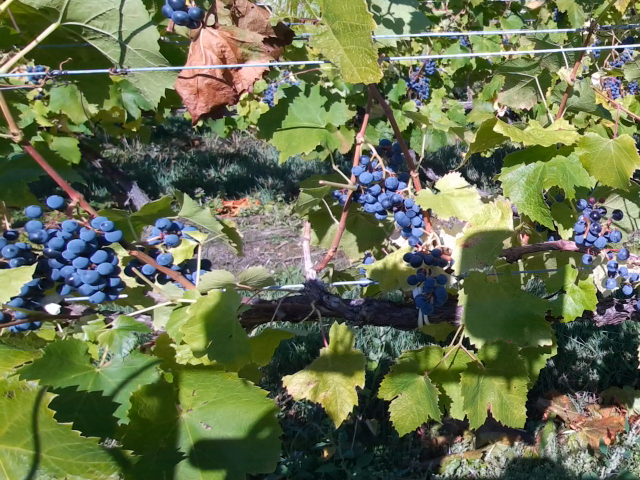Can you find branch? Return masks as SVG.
Segmentation results:
<instances>
[{"instance_id":"branch-1","label":"branch","mask_w":640,"mask_h":480,"mask_svg":"<svg viewBox=\"0 0 640 480\" xmlns=\"http://www.w3.org/2000/svg\"><path fill=\"white\" fill-rule=\"evenodd\" d=\"M373 97H375L376 102L378 103L380 108L384 111L385 115L390 121L392 128L394 129V131L398 136L405 162L408 168L410 169V171L416 173V176L414 179V188L417 192H420L422 190V186H421V180L419 178V170L412 160L405 134L402 128L399 126L396 116L393 114L392 110L388 107V105L382 98V95L380 94L375 84L370 85L367 90L365 109L363 111V118L360 122L359 128L357 130V134H356L355 150L352 155V163L354 165H358L360 163L359 158L362 152L363 137H364L365 130L367 128V124L371 118L370 113L372 111Z\"/></svg>"},{"instance_id":"branch-2","label":"branch","mask_w":640,"mask_h":480,"mask_svg":"<svg viewBox=\"0 0 640 480\" xmlns=\"http://www.w3.org/2000/svg\"><path fill=\"white\" fill-rule=\"evenodd\" d=\"M0 106L3 115L14 134L18 138V142L22 144L26 150L32 155V157L39 163V165L46 171V173L55 180L64 190H66L73 198H75L91 216L96 214V211L91 207L88 201L79 194L71 185L64 181L58 173H56L52 167L42 158L32 144L26 139L23 132L18 128L17 124L10 113L7 101L4 96V92L0 90Z\"/></svg>"},{"instance_id":"branch-3","label":"branch","mask_w":640,"mask_h":480,"mask_svg":"<svg viewBox=\"0 0 640 480\" xmlns=\"http://www.w3.org/2000/svg\"><path fill=\"white\" fill-rule=\"evenodd\" d=\"M353 195L354 192L352 190H349L346 193V199H345V206H344V212L342 214V220L339 224L338 230L336 231L335 235L332 238L331 243L329 244L328 250H327V256L325 258L324 261H321L317 266L316 269L318 271H322L323 269L327 268L333 258H334V253H335V249L337 247V245L339 244V240L340 238L343 236L345 229L349 223V217L351 214V208H352V202H353Z\"/></svg>"},{"instance_id":"branch-4","label":"branch","mask_w":640,"mask_h":480,"mask_svg":"<svg viewBox=\"0 0 640 480\" xmlns=\"http://www.w3.org/2000/svg\"><path fill=\"white\" fill-rule=\"evenodd\" d=\"M120 246L124 250L136 255L137 257H139V258L143 259L144 261H146L147 263L151 264L152 266L157 268L161 273L169 275L170 277H173L176 281H178L179 283L184 285L186 288H188L190 290H193L195 288V284L193 282H190L188 279H186L185 277L180 275L177 271L172 270L171 268L165 267L158 260H156L153 257L149 256L147 253L143 252L142 250L138 249L137 247L128 244L126 241H122L120 243Z\"/></svg>"},{"instance_id":"branch-5","label":"branch","mask_w":640,"mask_h":480,"mask_svg":"<svg viewBox=\"0 0 640 480\" xmlns=\"http://www.w3.org/2000/svg\"><path fill=\"white\" fill-rule=\"evenodd\" d=\"M569 94H570V88L566 87L565 88V92L563 93V95H562V97L560 99V102L558 104L557 114H556L557 118H561L562 117V110H563L564 104H565L566 99L568 98Z\"/></svg>"},{"instance_id":"branch-6","label":"branch","mask_w":640,"mask_h":480,"mask_svg":"<svg viewBox=\"0 0 640 480\" xmlns=\"http://www.w3.org/2000/svg\"><path fill=\"white\" fill-rule=\"evenodd\" d=\"M586 57V53H581L580 56L578 57V59L575 62L574 68H573V72L571 74V78L575 79L577 77L578 71H579V67L582 63V61L584 60V58Z\"/></svg>"},{"instance_id":"branch-7","label":"branch","mask_w":640,"mask_h":480,"mask_svg":"<svg viewBox=\"0 0 640 480\" xmlns=\"http://www.w3.org/2000/svg\"><path fill=\"white\" fill-rule=\"evenodd\" d=\"M590 27H591V30L589 32H587V35H586V37L584 39V42H583V46H588L589 45L591 37L594 34V30L596 29V24L592 23Z\"/></svg>"}]
</instances>
